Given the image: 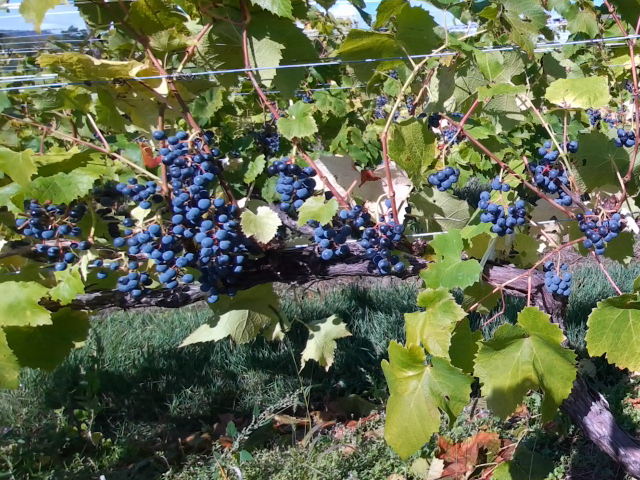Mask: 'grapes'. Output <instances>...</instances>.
Returning a JSON list of instances; mask_svg holds the SVG:
<instances>
[{
    "label": "grapes",
    "instance_id": "01657485",
    "mask_svg": "<svg viewBox=\"0 0 640 480\" xmlns=\"http://www.w3.org/2000/svg\"><path fill=\"white\" fill-rule=\"evenodd\" d=\"M153 138L157 141L164 140L170 148L163 147L159 150V155L163 156L161 162L169 166V173L166 174L169 187L172 189L173 200L171 201V223L174 235H181L184 239H194L195 244H199L198 260L201 264L210 262V255L216 253H240L234 256L231 269L233 275L226 278L228 284H235L236 273L243 271V265L251 257L261 255V248L257 245L253 236L246 238L235 229L238 226L239 211L237 205L228 204L224 199H214L213 207L220 214L216 217V222L221 225L215 233V240L209 237L207 232L214 227V221L210 218H203L212 204L207 190L209 183L216 180V175L223 171L220 160L214 159L222 154V150L214 147L211 153H200L191 156L190 163L183 159L188 156V143L182 142L188 139V132L180 130L175 136H166L164 131H154ZM189 180L188 192H183L182 183Z\"/></svg>",
    "mask_w": 640,
    "mask_h": 480
},
{
    "label": "grapes",
    "instance_id": "b958b902",
    "mask_svg": "<svg viewBox=\"0 0 640 480\" xmlns=\"http://www.w3.org/2000/svg\"><path fill=\"white\" fill-rule=\"evenodd\" d=\"M123 235H131L132 230L124 228ZM160 238V249H154L156 241L153 237ZM178 238L171 236L170 234L161 235V225L151 224L147 227V231L135 232L127 238V241L122 236H117L113 241L114 247L128 246V255L137 256L141 252L147 254V258L154 260V271L161 273L159 276V282L165 283V287L169 290H174L178 286V281L173 279L176 276V270L174 268H168V264L174 260V266L176 268L186 267L194 260L193 252H186L182 257H176V254L183 251L182 244H176Z\"/></svg>",
    "mask_w": 640,
    "mask_h": 480
},
{
    "label": "grapes",
    "instance_id": "0513c4c2",
    "mask_svg": "<svg viewBox=\"0 0 640 480\" xmlns=\"http://www.w3.org/2000/svg\"><path fill=\"white\" fill-rule=\"evenodd\" d=\"M290 160L289 156L282 157L281 161L273 160L268 166L271 175H278L275 191L280 194L279 209L288 211L290 201L293 196L292 209L299 210L306 203V198L314 194L317 181L314 178L317 171L309 166L300 167L296 163L286 164Z\"/></svg>",
    "mask_w": 640,
    "mask_h": 480
},
{
    "label": "grapes",
    "instance_id": "84f90ec7",
    "mask_svg": "<svg viewBox=\"0 0 640 480\" xmlns=\"http://www.w3.org/2000/svg\"><path fill=\"white\" fill-rule=\"evenodd\" d=\"M406 231L404 225L397 222L388 221L379 226V232L384 236H379L374 227H367L358 240L365 249V256L373 259L377 265L378 272L387 275L391 271V265L396 273H401L405 269V263L400 261L397 255H391L394 246L403 241L402 234Z\"/></svg>",
    "mask_w": 640,
    "mask_h": 480
},
{
    "label": "grapes",
    "instance_id": "f8a65327",
    "mask_svg": "<svg viewBox=\"0 0 640 480\" xmlns=\"http://www.w3.org/2000/svg\"><path fill=\"white\" fill-rule=\"evenodd\" d=\"M478 208L480 210H487L488 213H481L479 220L484 224L493 223L490 226L492 233H497L499 237H505L515 232L513 228L515 225H524L526 219V202L524 200H517L514 205H509L504 211V207L497 203H489L491 200V193L489 191H481L479 193Z\"/></svg>",
    "mask_w": 640,
    "mask_h": 480
},
{
    "label": "grapes",
    "instance_id": "5460f4e3",
    "mask_svg": "<svg viewBox=\"0 0 640 480\" xmlns=\"http://www.w3.org/2000/svg\"><path fill=\"white\" fill-rule=\"evenodd\" d=\"M552 147V142L550 140H546L543 143V146L537 148V152L539 155H543V158L538 160V165L536 163L530 164V170L534 172L533 182L540 186L542 189H546L551 194L558 193V197H554L553 200L561 205L570 206L572 204V197L565 193V191L559 188L557 182L552 181L554 178H558V181L562 184H567V174L562 168H550L547 172V176L541 175L543 170L547 168L548 165H555L556 161L559 157V151L553 150L548 152V150Z\"/></svg>",
    "mask_w": 640,
    "mask_h": 480
},
{
    "label": "grapes",
    "instance_id": "83cd7487",
    "mask_svg": "<svg viewBox=\"0 0 640 480\" xmlns=\"http://www.w3.org/2000/svg\"><path fill=\"white\" fill-rule=\"evenodd\" d=\"M584 215H595L591 210H586ZM582 213H578L577 222L579 229L584 232L587 239L583 241L585 248H592L594 246V253L596 255H603L606 252V247L603 245L605 242H610L614 237L619 235V227L621 226V214L615 212L610 219L603 221L587 222L584 219Z\"/></svg>",
    "mask_w": 640,
    "mask_h": 480
},
{
    "label": "grapes",
    "instance_id": "e5b3c951",
    "mask_svg": "<svg viewBox=\"0 0 640 480\" xmlns=\"http://www.w3.org/2000/svg\"><path fill=\"white\" fill-rule=\"evenodd\" d=\"M314 241L319 244L321 251V260L329 261L332 256L349 257L351 250L345 244L347 238L352 234V227L350 225H343L340 228V233L334 228H331L330 224L323 226L322 223L315 225Z\"/></svg>",
    "mask_w": 640,
    "mask_h": 480
},
{
    "label": "grapes",
    "instance_id": "2adb6a1f",
    "mask_svg": "<svg viewBox=\"0 0 640 480\" xmlns=\"http://www.w3.org/2000/svg\"><path fill=\"white\" fill-rule=\"evenodd\" d=\"M215 260L218 265L211 267L209 265H202L200 267V273L203 275L198 277V281L202 283L200 290L202 292L210 291V296L206 298L208 304H215L219 299V295L230 297H236L238 295L237 289L233 287H228L227 289L224 287L217 288V284L215 283L216 274L221 276L228 274L229 267L227 266V262L230 260V255L218 254Z\"/></svg>",
    "mask_w": 640,
    "mask_h": 480
},
{
    "label": "grapes",
    "instance_id": "ef6de9ee",
    "mask_svg": "<svg viewBox=\"0 0 640 480\" xmlns=\"http://www.w3.org/2000/svg\"><path fill=\"white\" fill-rule=\"evenodd\" d=\"M116 193H121L122 196L130 197L133 202H139V208L141 210H147L152 208V202L154 204H160L163 202L162 195H154L152 202L148 201L150 194H155L161 191L160 185L155 181H147L144 184L138 183L137 177H128L127 183H118L114 186Z\"/></svg>",
    "mask_w": 640,
    "mask_h": 480
},
{
    "label": "grapes",
    "instance_id": "1ff8f66d",
    "mask_svg": "<svg viewBox=\"0 0 640 480\" xmlns=\"http://www.w3.org/2000/svg\"><path fill=\"white\" fill-rule=\"evenodd\" d=\"M27 210L30 211V219L27 222L26 218L16 219L15 226L22 227L27 223V227L22 229L24 236H33L36 240L52 239L55 237L56 232L54 229H46L42 226L41 217L43 216V207L36 202H29L27 204Z\"/></svg>",
    "mask_w": 640,
    "mask_h": 480
},
{
    "label": "grapes",
    "instance_id": "54f908b8",
    "mask_svg": "<svg viewBox=\"0 0 640 480\" xmlns=\"http://www.w3.org/2000/svg\"><path fill=\"white\" fill-rule=\"evenodd\" d=\"M544 268L546 271L544 272L545 283L547 284V291L549 293H553L554 291L558 296H569L571 294V279L572 274L570 272H566L568 270V265L566 263H562L560 265V270L565 272L562 275V279L557 275L554 270L555 264L551 260H547L544 263Z\"/></svg>",
    "mask_w": 640,
    "mask_h": 480
},
{
    "label": "grapes",
    "instance_id": "91a60905",
    "mask_svg": "<svg viewBox=\"0 0 640 480\" xmlns=\"http://www.w3.org/2000/svg\"><path fill=\"white\" fill-rule=\"evenodd\" d=\"M118 291H130L131 297L137 299L143 295V290L138 288L140 283L143 286H152L153 279L148 278L146 272H129L126 276H119L116 279Z\"/></svg>",
    "mask_w": 640,
    "mask_h": 480
},
{
    "label": "grapes",
    "instance_id": "dcf779d0",
    "mask_svg": "<svg viewBox=\"0 0 640 480\" xmlns=\"http://www.w3.org/2000/svg\"><path fill=\"white\" fill-rule=\"evenodd\" d=\"M460 174L461 170L459 168L453 169L451 166H446L443 171L439 170L435 174H430L427 177V182L435 185L438 191L445 192L453 183L459 181Z\"/></svg>",
    "mask_w": 640,
    "mask_h": 480
},
{
    "label": "grapes",
    "instance_id": "802abce8",
    "mask_svg": "<svg viewBox=\"0 0 640 480\" xmlns=\"http://www.w3.org/2000/svg\"><path fill=\"white\" fill-rule=\"evenodd\" d=\"M339 217L341 219H354L353 225L355 227H361L371 219V216L367 212H363V207L360 205H355L349 211L347 209H342L339 211Z\"/></svg>",
    "mask_w": 640,
    "mask_h": 480
},
{
    "label": "grapes",
    "instance_id": "012428b0",
    "mask_svg": "<svg viewBox=\"0 0 640 480\" xmlns=\"http://www.w3.org/2000/svg\"><path fill=\"white\" fill-rule=\"evenodd\" d=\"M616 135L618 136L615 140L617 147L632 148L636 143V136L633 131L627 133L624 129H618Z\"/></svg>",
    "mask_w": 640,
    "mask_h": 480
},
{
    "label": "grapes",
    "instance_id": "9fbda902",
    "mask_svg": "<svg viewBox=\"0 0 640 480\" xmlns=\"http://www.w3.org/2000/svg\"><path fill=\"white\" fill-rule=\"evenodd\" d=\"M57 234L59 236L69 235L71 238H79L83 236L80 226L71 227L69 224H60L57 226Z\"/></svg>",
    "mask_w": 640,
    "mask_h": 480
},
{
    "label": "grapes",
    "instance_id": "34c12dc5",
    "mask_svg": "<svg viewBox=\"0 0 640 480\" xmlns=\"http://www.w3.org/2000/svg\"><path fill=\"white\" fill-rule=\"evenodd\" d=\"M36 252L46 254L47 257L57 258L61 254L59 246H49L48 244H39L36 246Z\"/></svg>",
    "mask_w": 640,
    "mask_h": 480
},
{
    "label": "grapes",
    "instance_id": "4a4d1313",
    "mask_svg": "<svg viewBox=\"0 0 640 480\" xmlns=\"http://www.w3.org/2000/svg\"><path fill=\"white\" fill-rule=\"evenodd\" d=\"M86 209H87L86 205H75L74 207H72L68 213L69 222L76 223L80 221L81 218L84 216Z\"/></svg>",
    "mask_w": 640,
    "mask_h": 480
},
{
    "label": "grapes",
    "instance_id": "23402543",
    "mask_svg": "<svg viewBox=\"0 0 640 480\" xmlns=\"http://www.w3.org/2000/svg\"><path fill=\"white\" fill-rule=\"evenodd\" d=\"M74 263V254L72 252L63 253L61 256V261L57 262L54 265L55 271H65L67 269L68 264Z\"/></svg>",
    "mask_w": 640,
    "mask_h": 480
},
{
    "label": "grapes",
    "instance_id": "62ce99fe",
    "mask_svg": "<svg viewBox=\"0 0 640 480\" xmlns=\"http://www.w3.org/2000/svg\"><path fill=\"white\" fill-rule=\"evenodd\" d=\"M489 188L491 190L494 191H502V192H508L511 189V185L509 183H501L500 181V177L498 175H495L493 177V180L491 181V184L489 185Z\"/></svg>",
    "mask_w": 640,
    "mask_h": 480
},
{
    "label": "grapes",
    "instance_id": "83beee25",
    "mask_svg": "<svg viewBox=\"0 0 640 480\" xmlns=\"http://www.w3.org/2000/svg\"><path fill=\"white\" fill-rule=\"evenodd\" d=\"M565 146L570 153H576L579 149V142L577 140L566 141ZM565 146L563 142L559 143V148L561 150H564Z\"/></svg>",
    "mask_w": 640,
    "mask_h": 480
}]
</instances>
